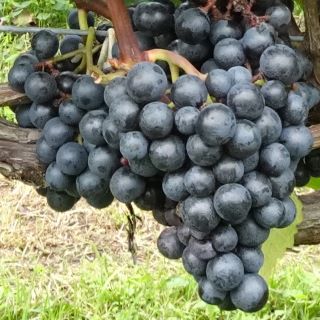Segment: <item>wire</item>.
<instances>
[{
    "label": "wire",
    "mask_w": 320,
    "mask_h": 320,
    "mask_svg": "<svg viewBox=\"0 0 320 320\" xmlns=\"http://www.w3.org/2000/svg\"><path fill=\"white\" fill-rule=\"evenodd\" d=\"M44 29L51 30L54 33H60V34H74V35L88 34V30H83V29L0 26V31L26 32V33H38L40 30H44Z\"/></svg>",
    "instance_id": "obj_1"
},
{
    "label": "wire",
    "mask_w": 320,
    "mask_h": 320,
    "mask_svg": "<svg viewBox=\"0 0 320 320\" xmlns=\"http://www.w3.org/2000/svg\"><path fill=\"white\" fill-rule=\"evenodd\" d=\"M95 35L108 36V32L106 30H95Z\"/></svg>",
    "instance_id": "obj_2"
}]
</instances>
